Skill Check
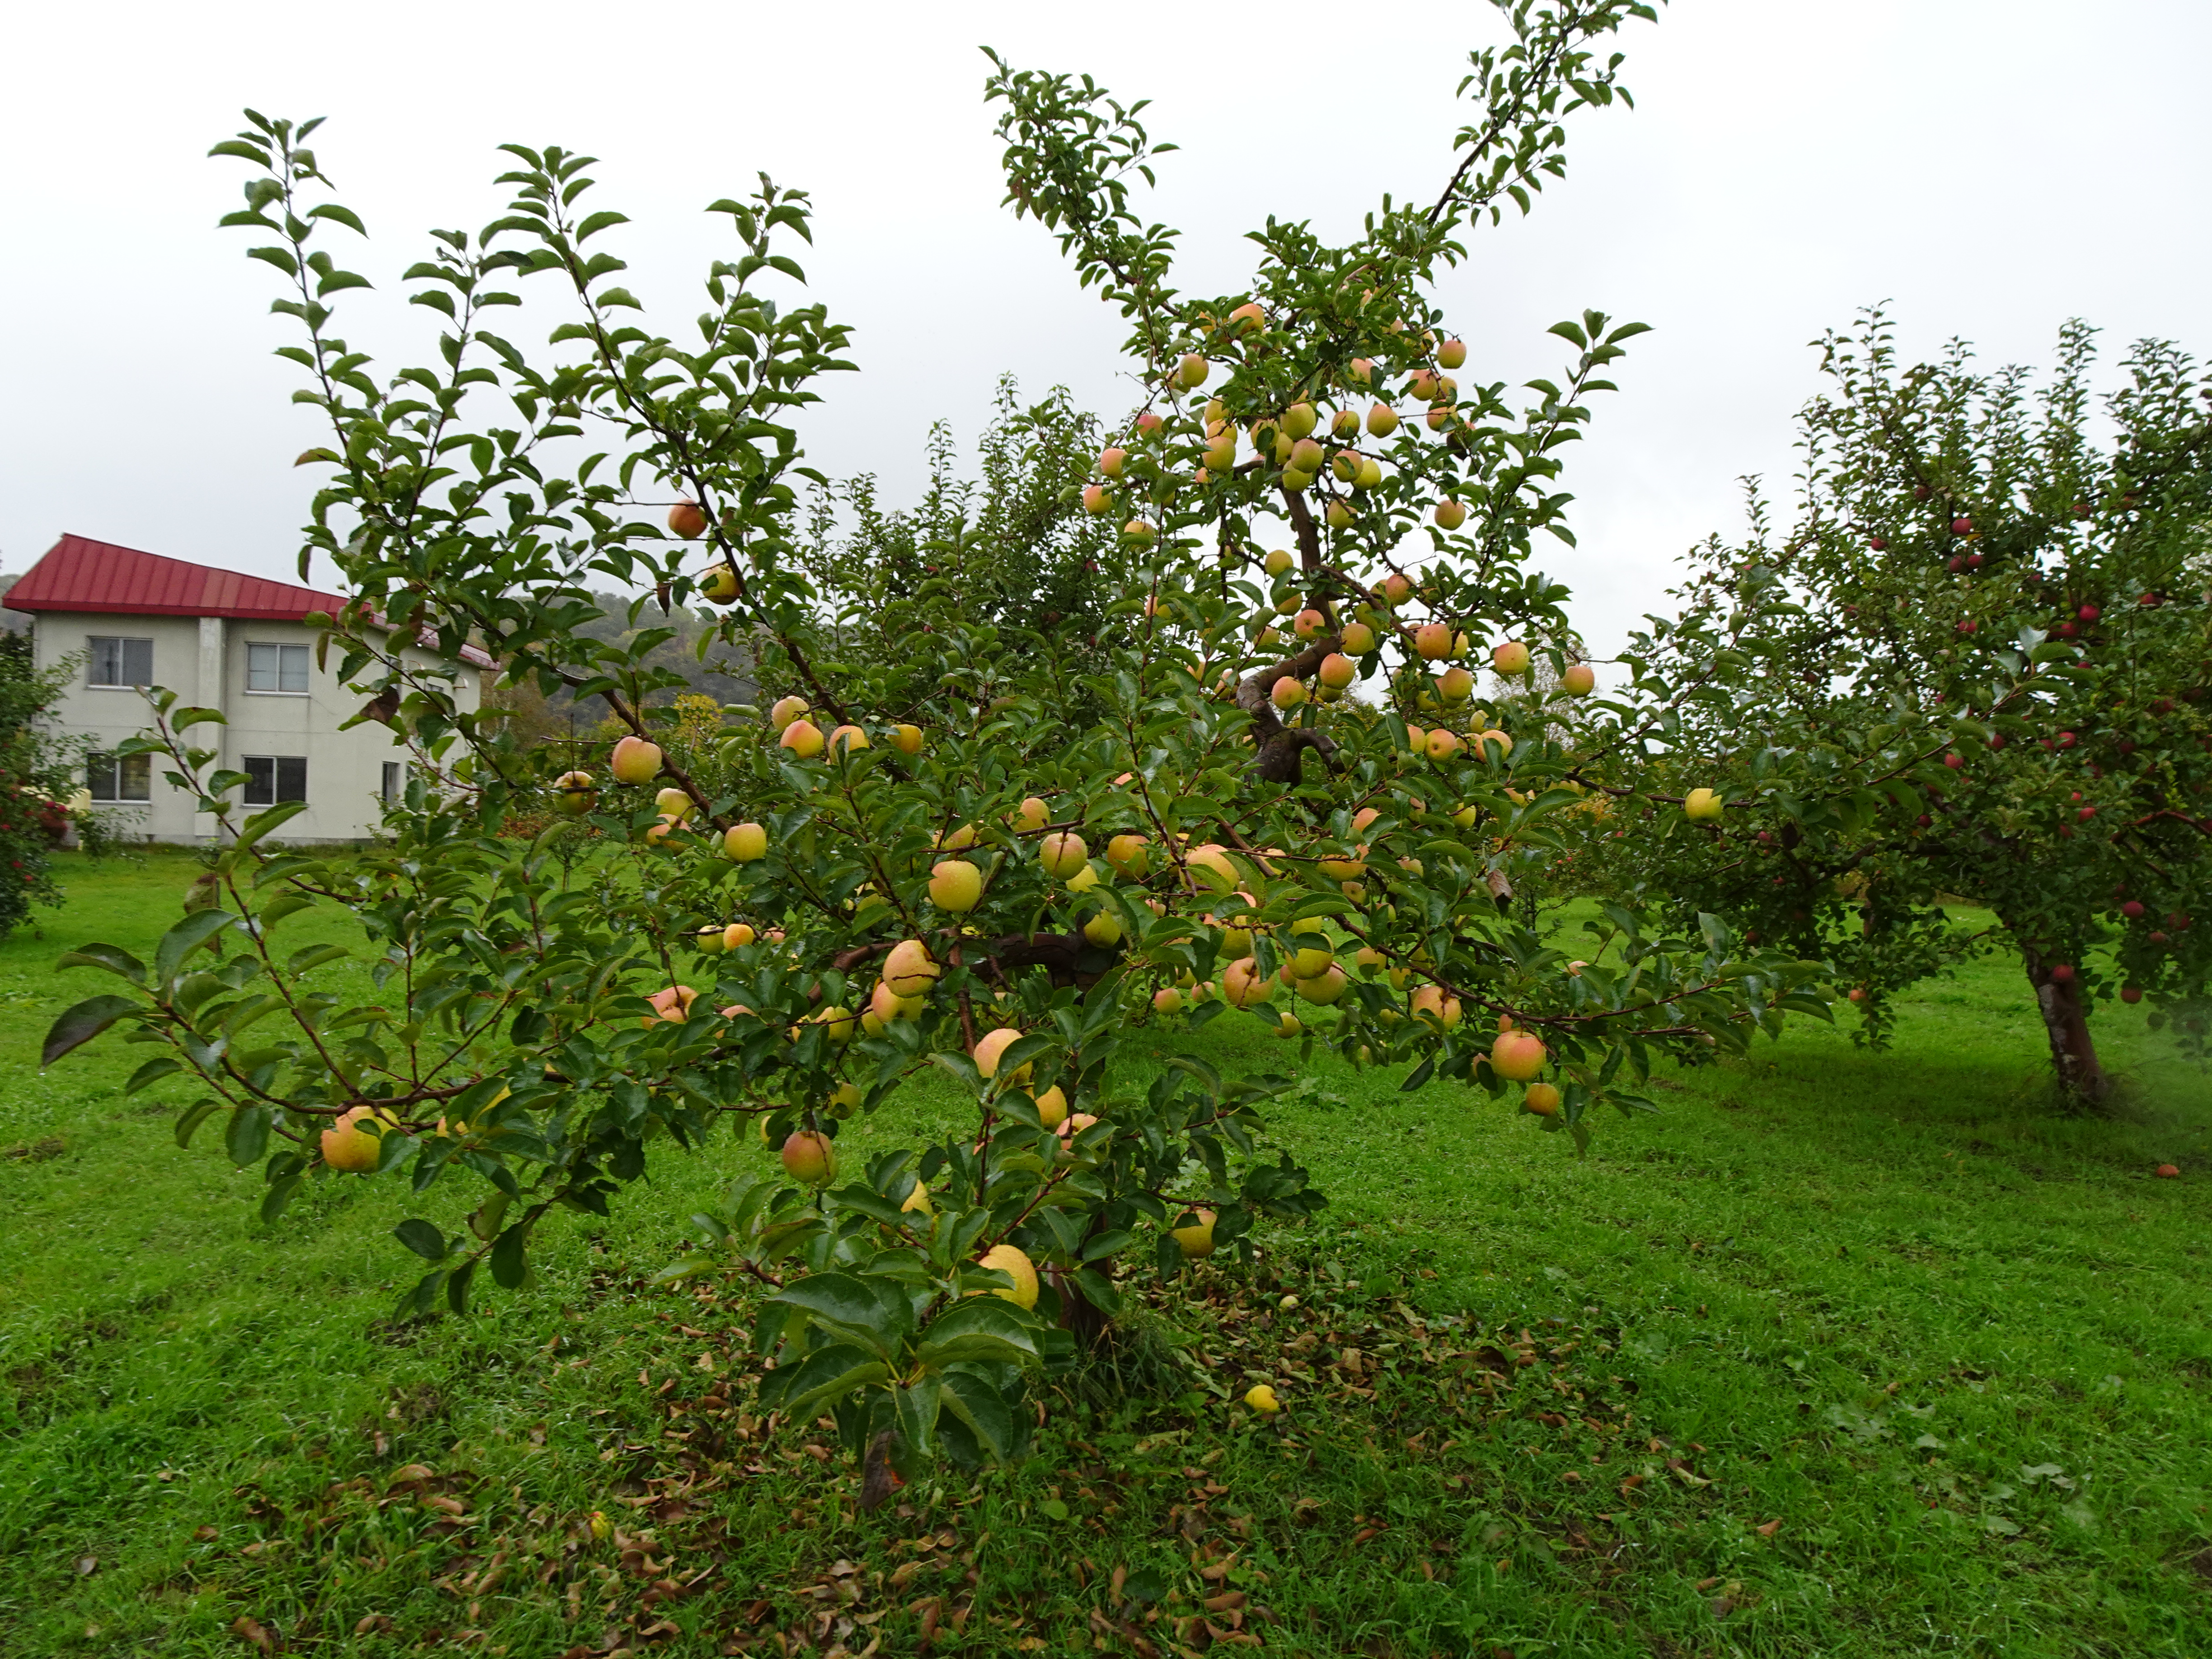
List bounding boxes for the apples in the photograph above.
[1337,879,1376,915]
[1226,302,1269,345]
[1442,795,1478,836]
[1350,457,1387,497]
[1447,419,1479,448]
[1279,458,1314,492]
[1046,610,1060,624]
[968,1131,1009,1166]
[1290,435,1327,477]
[1249,623,1282,657]
[1436,338,1468,372]
[1194,303,1237,347]
[1337,622,1376,658]
[1137,891,1174,922]
[1284,376,1320,411]
[1217,539,1249,575]
[1204,417,1243,447]
[1081,481,1115,519]
[805,1153,844,1194]
[760,1110,782,1148]
[1036,829,1092,883]
[1097,443,1132,483]
[876,1172,936,1234]
[1253,842,1293,877]
[882,938,946,998]
[1211,668,1246,702]
[1431,495,1468,533]
[1437,663,1476,704]
[1544,777,1579,806]
[1175,351,1213,389]
[1243,1384,1284,1416]
[1101,763,1140,803]
[1017,1076,1071,1132]
[1350,600,1389,638]
[1397,621,1423,648]
[1316,650,1360,694]
[1374,314,1407,342]
[696,561,747,609]
[859,995,891,1043]
[1270,897,1322,942]
[433,1110,487,1149]
[1492,781,1539,826]
[1246,412,1284,454]
[824,722,870,770]
[1411,622,1455,664]
[643,810,695,853]
[1331,447,1365,485]
[791,1010,824,1053]
[1330,408,1362,441]
[1268,430,1294,462]
[1402,325,1437,360]
[1184,655,1210,687]
[1471,700,1506,733]
[848,872,897,919]
[777,716,828,763]
[1065,863,1102,901]
[1144,477,1179,509]
[1318,830,1374,885]
[762,927,791,948]
[960,1241,1043,1321]
[1394,786,1427,826]
[1494,1007,1537,1040]
[1049,1110,1110,1164]
[1377,995,1412,1039]
[1200,393,1236,424]
[1216,884,1265,920]
[1151,984,1185,1020]
[1360,1036,1392,1068]
[1279,928,1336,985]
[1193,977,1220,1010]
[722,924,755,952]
[779,1128,833,1186]
[695,924,724,952]
[1560,663,1596,702]
[1259,544,1297,582]
[965,1023,1038,1093]
[768,693,818,736]
[1170,960,1198,989]
[1133,411,1169,445]
[1361,902,1394,936]
[1521,1079,1563,1121]
[1163,920,1195,955]
[717,1002,761,1040]
[1266,673,1309,715]
[1345,806,1393,844]
[1444,626,1472,662]
[665,497,713,544]
[711,503,751,535]
[1291,606,1328,644]
[1383,569,1415,607]
[1200,909,1257,959]
[1194,608,1225,643]
[1353,942,1392,977]
[1003,790,1056,845]
[1363,403,1402,441]
[1557,954,1597,990]
[507,1053,568,1111]
[1424,396,1463,434]
[1078,901,1129,952]
[866,973,930,1031]
[1198,434,1240,476]
[1680,779,1735,832]
[922,621,939,638]
[881,718,929,766]
[1143,588,1176,620]
[1162,1204,1226,1265]
[1335,279,1374,313]
[812,1003,856,1050]
[1412,985,1463,1040]
[1269,1008,1305,1043]
[1294,958,1354,1010]
[1451,732,1472,759]
[1271,581,1305,615]
[922,855,990,917]
[1392,848,1428,885]
[1182,837,1248,903]
[1324,493,1361,533]
[1474,725,1517,767]
[468,1077,526,1135]
[1469,1046,1510,1091]
[1415,673,1445,714]
[1340,354,1383,396]
[1365,576,1401,611]
[927,564,941,576]
[1222,951,1277,1014]
[652,787,700,819]
[1191,461,1221,492]
[1488,1023,1550,1085]
[1425,373,1463,406]
[643,985,703,1035]
[1491,639,1531,678]
[1387,668,1421,697]
[609,731,667,791]
[1119,516,1162,555]
[552,768,600,821]
[1407,366,1441,402]
[925,809,986,855]
[321,1104,403,1176]
[1287,398,1323,443]
[1387,719,1429,764]
[724,821,768,865]
[820,1077,864,1122]
[1421,727,1457,768]
[1389,959,1421,993]
[1084,557,1101,574]
[1104,827,1159,885]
